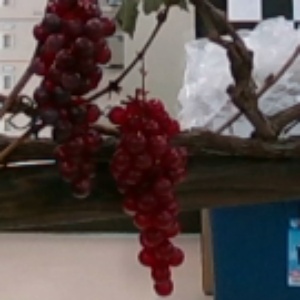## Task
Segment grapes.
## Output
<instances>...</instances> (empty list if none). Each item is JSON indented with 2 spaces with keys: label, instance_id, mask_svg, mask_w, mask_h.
Instances as JSON below:
<instances>
[{
  "label": "grapes",
  "instance_id": "01657485",
  "mask_svg": "<svg viewBox=\"0 0 300 300\" xmlns=\"http://www.w3.org/2000/svg\"><path fill=\"white\" fill-rule=\"evenodd\" d=\"M45 13L32 28L33 37L40 41L32 69L44 75L33 91L36 117L53 125V157L61 179L71 185L75 198L86 200L92 194L91 180L98 174L90 159L102 149L104 136L89 128V123L100 119V108L82 96L100 83L99 64L112 58L104 37L115 33L116 24L101 17L97 0H51Z\"/></svg>",
  "mask_w": 300,
  "mask_h": 300
},
{
  "label": "grapes",
  "instance_id": "b958b902",
  "mask_svg": "<svg viewBox=\"0 0 300 300\" xmlns=\"http://www.w3.org/2000/svg\"><path fill=\"white\" fill-rule=\"evenodd\" d=\"M107 119L119 125L123 134L112 154L109 171L118 192L125 196L124 212L133 216V224L140 230L139 243L144 249L139 261L152 268L155 292L167 296L173 290L170 266H178L184 260L183 251L169 241L180 232L175 220L180 203L174 198L172 186L185 176L187 168L186 153L169 147L180 125L170 119L158 98L147 102L132 99L126 109L113 106Z\"/></svg>",
  "mask_w": 300,
  "mask_h": 300
}]
</instances>
